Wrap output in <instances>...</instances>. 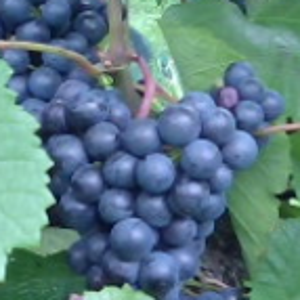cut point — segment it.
<instances>
[{"mask_svg":"<svg viewBox=\"0 0 300 300\" xmlns=\"http://www.w3.org/2000/svg\"><path fill=\"white\" fill-rule=\"evenodd\" d=\"M122 54L125 64H136L144 74V97L141 99V103L135 111L137 116L147 117L154 106L155 74L153 68L151 67L149 60L140 53L123 48Z\"/></svg>","mask_w":300,"mask_h":300,"instance_id":"6a23745f","label":"cut point"}]
</instances>
